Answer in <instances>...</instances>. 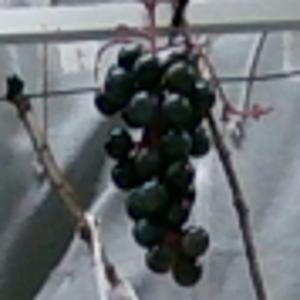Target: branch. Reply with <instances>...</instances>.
<instances>
[{"instance_id":"obj_1","label":"branch","mask_w":300,"mask_h":300,"mask_svg":"<svg viewBox=\"0 0 300 300\" xmlns=\"http://www.w3.org/2000/svg\"><path fill=\"white\" fill-rule=\"evenodd\" d=\"M5 101L14 107L17 119L27 132L37 161L40 164L51 187L63 205L76 233L84 245L92 265L95 266L108 300H138L130 288L119 277L114 263L101 249L92 226L82 212L79 203L65 181L49 142L35 117L34 109L25 96L26 82L17 73L5 76Z\"/></svg>"},{"instance_id":"obj_3","label":"branch","mask_w":300,"mask_h":300,"mask_svg":"<svg viewBox=\"0 0 300 300\" xmlns=\"http://www.w3.org/2000/svg\"><path fill=\"white\" fill-rule=\"evenodd\" d=\"M171 2V26L167 31L170 39L181 36L184 49L181 53L192 52L194 54L196 44L191 39L190 24L187 19V8L191 0H169Z\"/></svg>"},{"instance_id":"obj_2","label":"branch","mask_w":300,"mask_h":300,"mask_svg":"<svg viewBox=\"0 0 300 300\" xmlns=\"http://www.w3.org/2000/svg\"><path fill=\"white\" fill-rule=\"evenodd\" d=\"M204 122L211 134V139L229 188L231 195L230 205L235 211L238 229L241 233L249 279L255 300H268L254 242L251 213L246 202L241 180L233 163L232 152L224 141L213 109L209 111L208 117Z\"/></svg>"}]
</instances>
